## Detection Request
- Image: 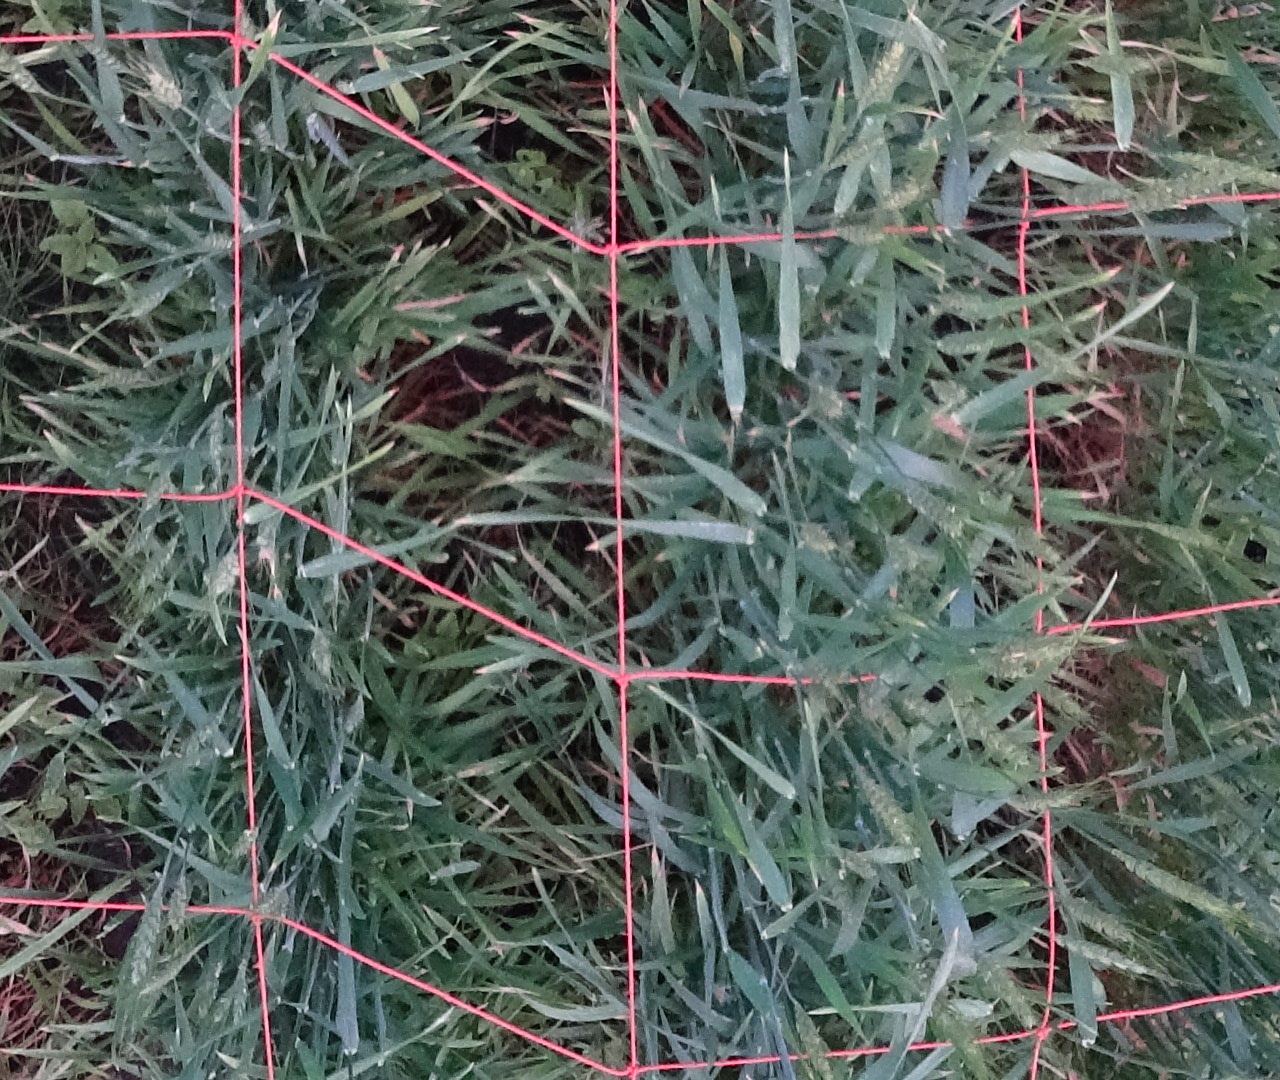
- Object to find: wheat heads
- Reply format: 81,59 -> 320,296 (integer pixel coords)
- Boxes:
851,767 -> 911,844
819,383 -> 845,417
969,710 -> 1036,769
798,997 -> 831,1068
211,411 -> 227,465
1079,51 -> 1146,74
882,176 -> 920,210
114,631 -> 135,653
1039,678 -> 1092,727
129,280 -> 170,319
930,988 -> 980,1069
812,656 -> 847,699
251,112 -> 274,148
907,479 -> 961,533
207,233 -> 235,251
212,985 -> 238,1023
1125,171 -> 1225,212
936,289 -> 992,319
859,42 -> 909,105
39,750 -> 63,807
1171,153 -> 1279,192
85,40 -> 135,74
199,959 -> 221,1017
831,846 -> 873,880
130,892 -> 165,981
981,952 -> 1040,1032
806,517 -> 839,556
831,137 -> 886,170
934,339 -> 983,354
1021,641 -> 1082,663
1064,98 -> 1107,119
977,646 -> 1036,687
868,695 -> 905,735
1050,934 -> 1142,978
144,584 -> 174,615
1022,334 -> 1077,373
228,828 -> 259,860
1005,522 -> 1059,565
1121,849 -> 1244,922
896,682 -> 942,726
241,12 -> 256,38
844,221 -> 886,246
148,70 -> 181,108
1006,784 -> 1085,818
183,712 -> 222,750
142,538 -> 177,585
81,369 -> 140,393
233,977 -> 249,1022
2,58 -> 45,95
993,133 -> 1062,152
212,551 -> 244,596
1063,897 -> 1119,935
309,631 -> 337,678
167,877 -> 187,928
1152,519 -> 1219,547
252,884 -> 287,916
